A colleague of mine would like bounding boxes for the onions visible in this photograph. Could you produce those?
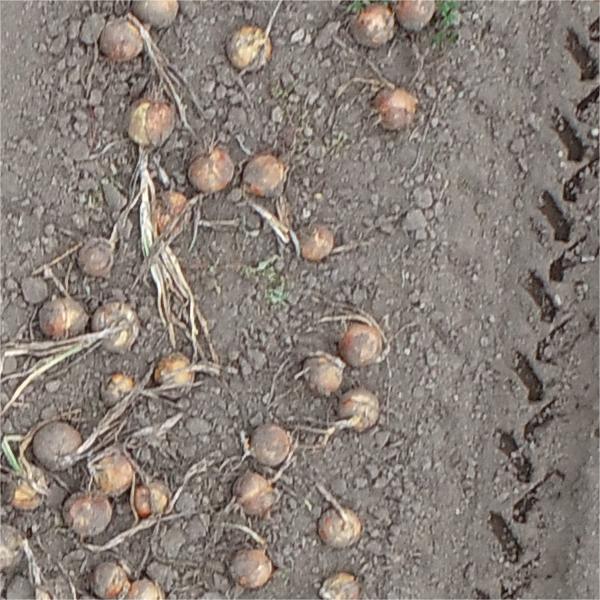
[226,24,270,69]
[122,577,164,599]
[351,5,392,44]
[101,370,138,399]
[40,294,85,335]
[155,189,191,237]
[128,483,167,518]
[318,506,360,546]
[393,0,432,32]
[239,155,284,198]
[303,353,343,393]
[86,558,128,596]
[152,349,189,388]
[374,84,417,131]
[89,451,132,493]
[228,546,272,586]
[187,146,231,189]
[75,240,111,276]
[318,570,360,599]
[233,472,274,514]
[131,0,176,27]
[295,223,333,260]
[99,19,140,60]
[0,522,24,566]
[338,390,376,429]
[247,422,290,467]
[93,300,137,350]
[337,321,383,367]
[64,490,108,533]
[9,480,43,509]
[127,99,174,145]
[30,419,80,469]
